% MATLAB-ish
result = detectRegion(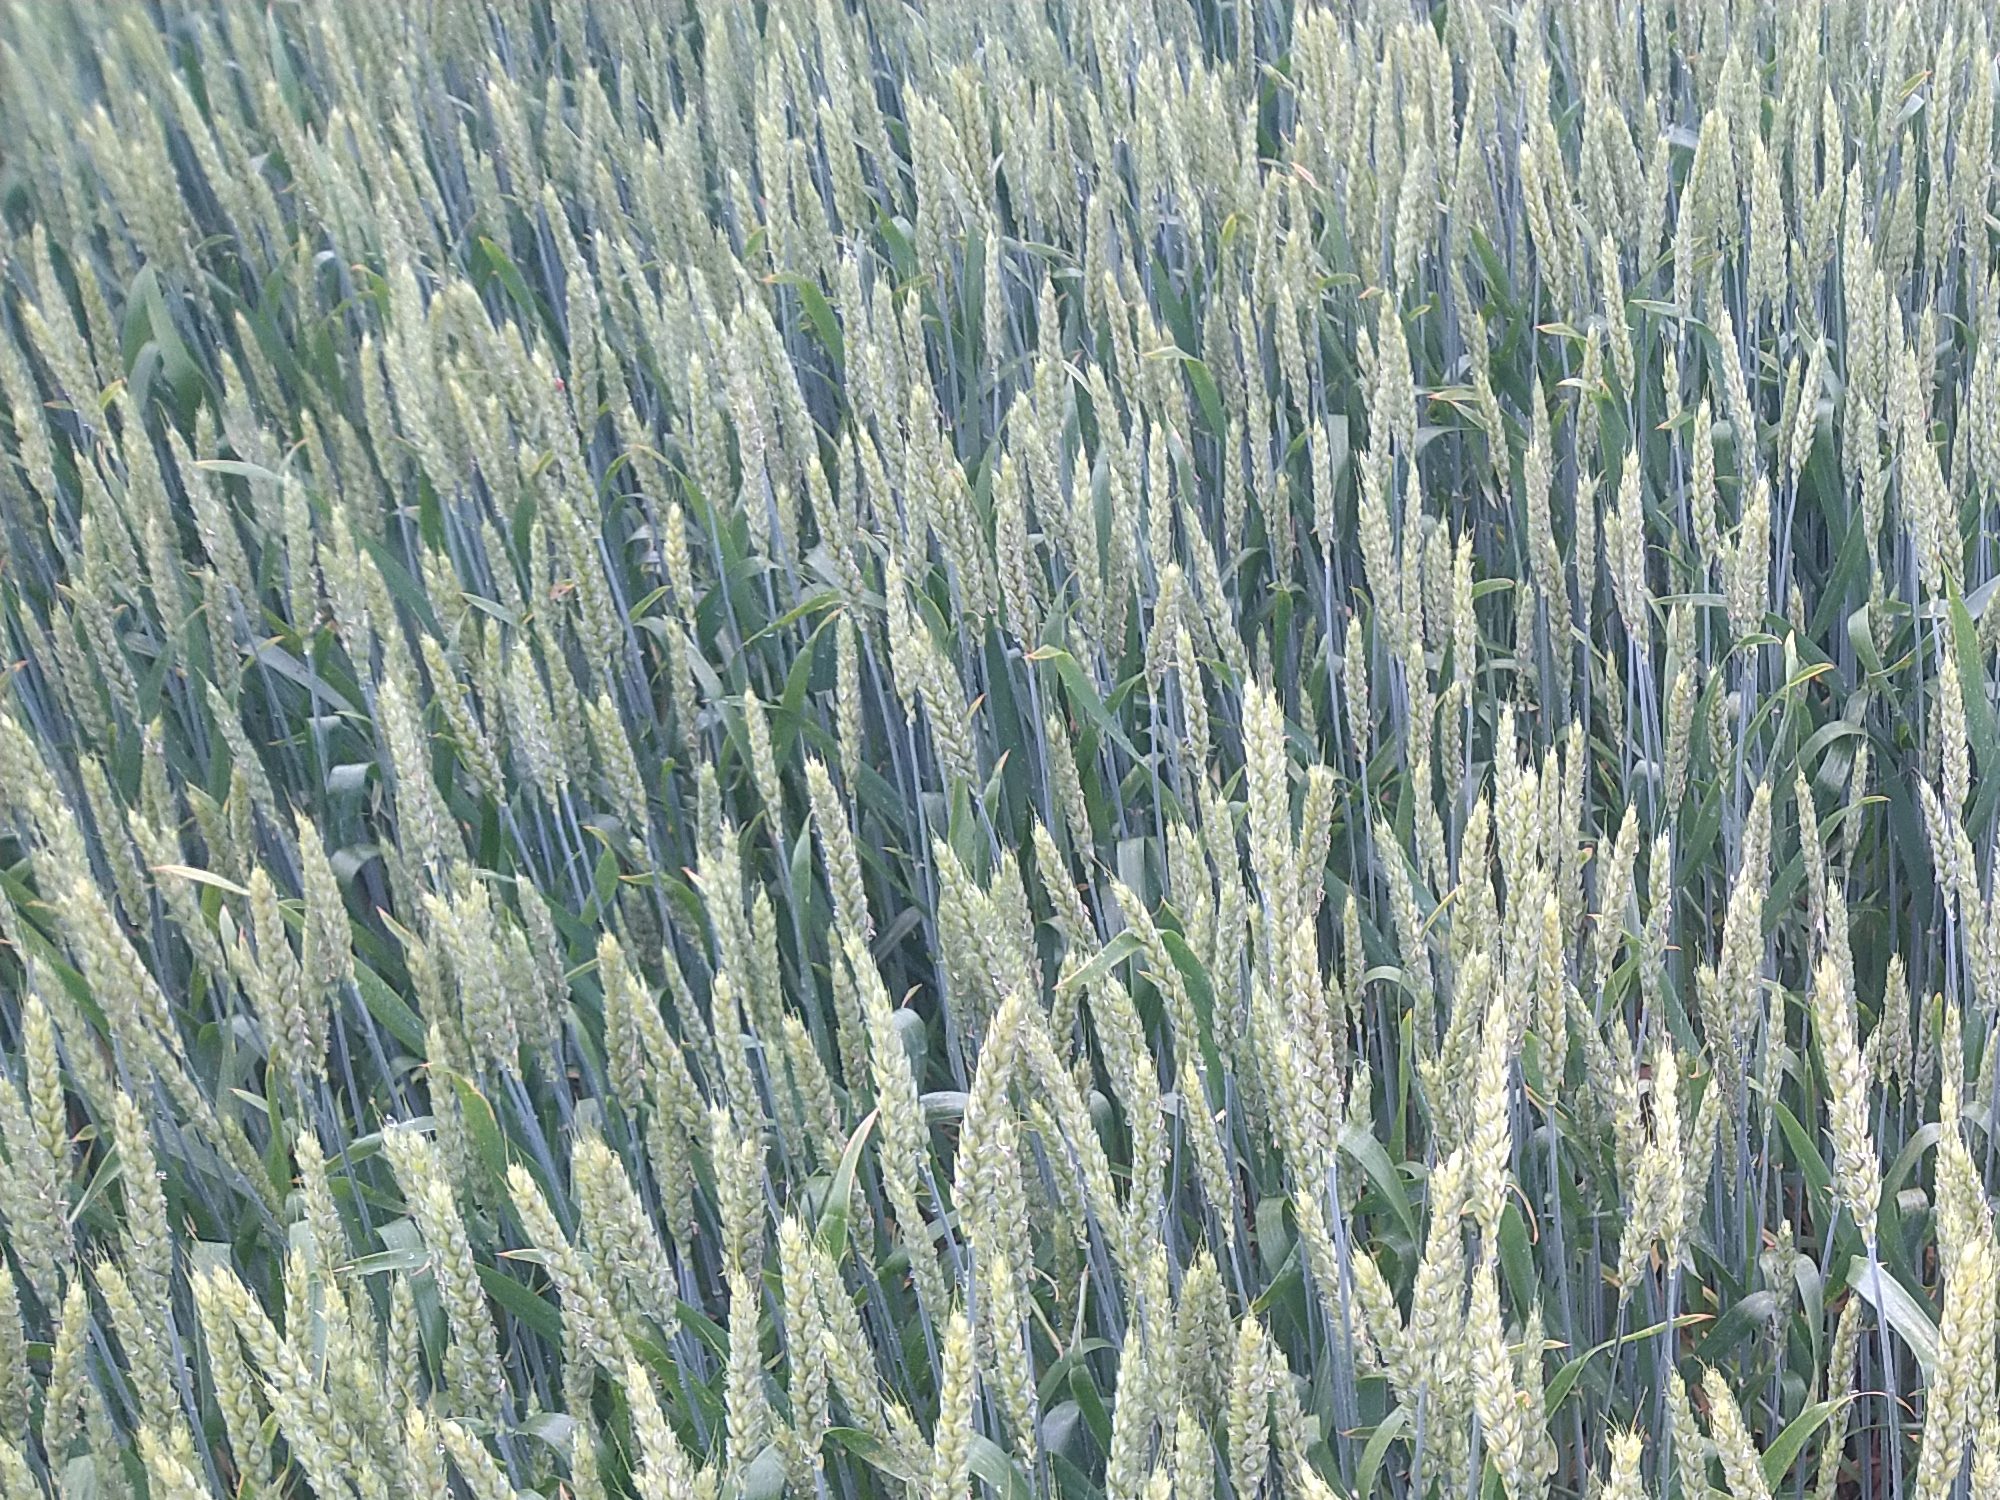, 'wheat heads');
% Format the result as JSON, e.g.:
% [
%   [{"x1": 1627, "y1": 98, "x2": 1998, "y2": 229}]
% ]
[
  {"x1": 1176, "y1": 630, "x2": 1209, "y2": 765},
  {"x1": 1018, "y1": 1134, "x2": 1052, "y2": 1227},
  {"x1": 1338, "y1": 1074, "x2": 1373, "y2": 1211},
  {"x1": 666, "y1": 505, "x2": 694, "y2": 618},
  {"x1": 1882, "y1": 954, "x2": 1909, "y2": 1023},
  {"x1": 1974, "y1": 586, "x2": 2000, "y2": 655},
  {"x1": 1368, "y1": 384, "x2": 1392, "y2": 486},
  {"x1": 20, "y1": 604, "x2": 69, "y2": 713},
  {"x1": 759, "y1": 123, "x2": 787, "y2": 268},
  {"x1": 1843, "y1": 744, "x2": 1868, "y2": 865},
  {"x1": 1606, "y1": 652, "x2": 1623, "y2": 740},
  {"x1": 461, "y1": 898, "x2": 517, "y2": 1066},
  {"x1": 1603, "y1": 514, "x2": 1626, "y2": 624},
  {"x1": 1286, "y1": 922, "x2": 1342, "y2": 1188},
  {"x1": 625, "y1": 1365, "x2": 695, "y2": 1495},
  {"x1": 1915, "y1": 993, "x2": 1934, "y2": 1115},
  {"x1": 1545, "y1": 539, "x2": 1572, "y2": 688},
  {"x1": 597, "y1": 697, "x2": 649, "y2": 826},
  {"x1": 1176, "y1": 1271, "x2": 1213, "y2": 1418},
  {"x1": 512, "y1": 652, "x2": 565, "y2": 783},
  {"x1": 952, "y1": 997, "x2": 1022, "y2": 1229},
  {"x1": 96, "y1": 155, "x2": 159, "y2": 262},
  {"x1": 597, "y1": 938, "x2": 644, "y2": 1106},
  {"x1": 779, "y1": 1221, "x2": 830, "y2": 1444},
  {"x1": 1682, "y1": 1079, "x2": 1722, "y2": 1216},
  {"x1": 23, "y1": 999, "x2": 69, "y2": 1172},
  {"x1": 1640, "y1": 834, "x2": 1672, "y2": 1004},
  {"x1": 83, "y1": 1387, "x2": 135, "y2": 1500},
  {"x1": 1145, "y1": 570, "x2": 1180, "y2": 687},
  {"x1": 1311, "y1": 422, "x2": 1333, "y2": 538},
  {"x1": 765, "y1": 1044, "x2": 803, "y2": 1160},
  {"x1": 599, "y1": 344, "x2": 637, "y2": 440},
  {"x1": 508, "y1": 932, "x2": 555, "y2": 1073},
  {"x1": 480, "y1": 155, "x2": 511, "y2": 252},
  {"x1": 1106, "y1": 1338, "x2": 1142, "y2": 1500},
  {"x1": 134, "y1": 1025, "x2": 221, "y2": 1143},
  {"x1": 337, "y1": 418, "x2": 387, "y2": 539},
  {"x1": 1293, "y1": 1196, "x2": 1367, "y2": 1364},
  {"x1": 424, "y1": 1028, "x2": 464, "y2": 1185},
  {"x1": 1212, "y1": 299, "x2": 1245, "y2": 417},
  {"x1": 780, "y1": 25, "x2": 815, "y2": 135},
  {"x1": 619, "y1": 243, "x2": 665, "y2": 356},
  {"x1": 1888, "y1": 292, "x2": 1898, "y2": 439},
  {"x1": 1143, "y1": 1255, "x2": 1170, "y2": 1367},
  {"x1": 743, "y1": 690, "x2": 783, "y2": 831},
  {"x1": 1413, "y1": 762, "x2": 1433, "y2": 876},
  {"x1": 1970, "y1": 353, "x2": 1988, "y2": 492},
  {"x1": 1, "y1": 1168, "x2": 64, "y2": 1319},
  {"x1": 1287, "y1": 178, "x2": 1315, "y2": 280},
  {"x1": 1771, "y1": 1222, "x2": 1797, "y2": 1353},
  {"x1": 1111, "y1": 887, "x2": 1205, "y2": 1065},
  {"x1": 804, "y1": 761, "x2": 872, "y2": 944},
  {"x1": 1233, "y1": 1041, "x2": 1267, "y2": 1155},
  {"x1": 874, "y1": 283, "x2": 908, "y2": 410},
  {"x1": 575, "y1": 1149, "x2": 680, "y2": 1331},
  {"x1": 1943, "y1": 1006, "x2": 1964, "y2": 1101},
  {"x1": 1807, "y1": 1302, "x2": 1858, "y2": 1500},
  {"x1": 1346, "y1": 619, "x2": 1370, "y2": 749},
  {"x1": 191, "y1": 1278, "x2": 271, "y2": 1486},
  {"x1": 1716, "y1": 114, "x2": 1739, "y2": 242},
  {"x1": 903, "y1": 294, "x2": 931, "y2": 388},
  {"x1": 1429, "y1": 808, "x2": 1449, "y2": 897},
  {"x1": 1667, "y1": 1370, "x2": 1706, "y2": 1500},
  {"x1": 1883, "y1": 185, "x2": 1913, "y2": 278},
  {"x1": 571, "y1": 1432, "x2": 612, "y2": 1500},
  {"x1": 1515, "y1": 584, "x2": 1536, "y2": 694},
  {"x1": 755, "y1": 306, "x2": 816, "y2": 448},
  {"x1": 1085, "y1": 93, "x2": 1121, "y2": 208},
  {"x1": 419, "y1": 638, "x2": 505, "y2": 797},
  {"x1": 1472, "y1": 1001, "x2": 1511, "y2": 1225},
  {"x1": 71, "y1": 588, "x2": 143, "y2": 723},
  {"x1": 1467, "y1": 1268, "x2": 1520, "y2": 1476},
  {"x1": 379, "y1": 687, "x2": 436, "y2": 860},
  {"x1": 708, "y1": 408, "x2": 734, "y2": 513},
  {"x1": 1186, "y1": 894, "x2": 1212, "y2": 967},
  {"x1": 1920, "y1": 309, "x2": 1936, "y2": 411},
  {"x1": 774, "y1": 1432, "x2": 831, "y2": 1500},
  {"x1": 1403, "y1": 549, "x2": 1421, "y2": 643},
  {"x1": 644, "y1": 154, "x2": 679, "y2": 260},
  {"x1": 910, "y1": 627, "x2": 979, "y2": 789},
  {"x1": 1344, "y1": 897, "x2": 1364, "y2": 1009},
  {"x1": 360, "y1": 336, "x2": 405, "y2": 500},
  {"x1": 1264, "y1": 877, "x2": 1294, "y2": 1002},
  {"x1": 449, "y1": 383, "x2": 507, "y2": 510},
  {"x1": 994, "y1": 1126, "x2": 1032, "y2": 1292},
  {"x1": 1778, "y1": 356, "x2": 1802, "y2": 475},
  {"x1": 1955, "y1": 1147, "x2": 1995, "y2": 1244},
  {"x1": 1053, "y1": 1215, "x2": 1078, "y2": 1340},
  {"x1": 937, "y1": 119, "x2": 988, "y2": 227},
  {"x1": 1744, "y1": 783, "x2": 1773, "y2": 891},
  {"x1": 698, "y1": 857, "x2": 751, "y2": 1014},
  {"x1": 857, "y1": 429, "x2": 900, "y2": 551},
  {"x1": 119, "y1": 1235, "x2": 174, "y2": 1358},
  {"x1": 1392, "y1": 319, "x2": 1417, "y2": 453},
  {"x1": 1841, "y1": 366, "x2": 1861, "y2": 483},
  {"x1": 210, "y1": 1277, "x2": 361, "y2": 1470},
  {"x1": 43, "y1": 1287, "x2": 89, "y2": 1472},
  {"x1": 1453, "y1": 535, "x2": 1476, "y2": 679},
  {"x1": 1238, "y1": 298, "x2": 1269, "y2": 423},
  {"x1": 1619, "y1": 1150, "x2": 1657, "y2": 1283},
  {"x1": 31, "y1": 960, "x2": 113, "y2": 1113},
  {"x1": 1148, "y1": 424, "x2": 1171, "y2": 567},
  {"x1": 1507, "y1": 770, "x2": 1539, "y2": 942},
  {"x1": 1977, "y1": 1027, "x2": 2000, "y2": 1105},
  {"x1": 390, "y1": 153, "x2": 442, "y2": 263},
  {"x1": 0, "y1": 1443, "x2": 65, "y2": 1500},
  {"x1": 1575, "y1": 329, "x2": 1600, "y2": 465},
  {"x1": 1823, "y1": 88, "x2": 1843, "y2": 230},
  {"x1": 1174, "y1": 1413, "x2": 1214, "y2": 1500},
  {"x1": 0, "y1": 1084, "x2": 71, "y2": 1243},
  {"x1": 360, "y1": 553, "x2": 399, "y2": 640},
  {"x1": 662, "y1": 1126, "x2": 697, "y2": 1254},
  {"x1": 1493, "y1": 707, "x2": 1517, "y2": 862},
  {"x1": 1272, "y1": 1354, "x2": 1306, "y2": 1500},
  {"x1": 1934, "y1": 1083, "x2": 1961, "y2": 1270},
  {"x1": 1918, "y1": 781, "x2": 1956, "y2": 909},
  {"x1": 440, "y1": 1428, "x2": 576, "y2": 1500},
  {"x1": 1265, "y1": 695, "x2": 1289, "y2": 852},
  {"x1": 1442, "y1": 684, "x2": 1464, "y2": 800},
  {"x1": 542, "y1": 185, "x2": 582, "y2": 272},
  {"x1": 1128, "y1": 1061, "x2": 1163, "y2": 1248},
  {"x1": 952, "y1": 497, "x2": 986, "y2": 619},
  {"x1": 422, "y1": 896, "x2": 470, "y2": 972},
  {"x1": 1721, "y1": 1108, "x2": 1738, "y2": 1191},
  {"x1": 589, "y1": 544, "x2": 627, "y2": 662},
  {"x1": 1182, "y1": 1067, "x2": 1235, "y2": 1234},
  {"x1": 81, "y1": 516, "x2": 110, "y2": 604},
  {"x1": 1477, "y1": 375, "x2": 1511, "y2": 492},
  {"x1": 971, "y1": 86, "x2": 994, "y2": 198},
  {"x1": 1608, "y1": 1438, "x2": 1661, "y2": 1500},
  {"x1": 1440, "y1": 957, "x2": 1490, "y2": 1069},
  {"x1": 783, "y1": 1019, "x2": 842, "y2": 1164},
  {"x1": 224, "y1": 1117, "x2": 283, "y2": 1218},
  {"x1": 1450, "y1": 264, "x2": 1476, "y2": 353},
  {"x1": 51, "y1": 609, "x2": 112, "y2": 749},
  {"x1": 667, "y1": 623, "x2": 700, "y2": 765},
  {"x1": 1951, "y1": 409, "x2": 1968, "y2": 503},
  {"x1": 1068, "y1": 622, "x2": 1098, "y2": 691},
  {"x1": 621, "y1": 883, "x2": 664, "y2": 972},
  {"x1": 1765, "y1": 986, "x2": 1787, "y2": 1099},
  {"x1": 1924, "y1": 448, "x2": 1964, "y2": 590},
  {"x1": 828, "y1": 929, "x2": 863, "y2": 1024},
  {"x1": 1404, "y1": 461, "x2": 1423, "y2": 557},
  {"x1": 1358, "y1": 503, "x2": 1398, "y2": 639},
  {"x1": 248, "y1": 875, "x2": 307, "y2": 1059},
  {"x1": 1706, "y1": 1375, "x2": 1797, "y2": 1500},
  {"x1": 1252, "y1": 993, "x2": 1286, "y2": 1147},
  {"x1": 1595, "y1": 803, "x2": 1640, "y2": 968},
  {"x1": 1859, "y1": 404, "x2": 1881, "y2": 542},
  {"x1": 354, "y1": 1365, "x2": 413, "y2": 1495},
  {"x1": 300, "y1": 410, "x2": 338, "y2": 502},
  {"x1": 218, "y1": 506, "x2": 260, "y2": 615},
  {"x1": 1212, "y1": 799, "x2": 1240, "y2": 895},
  {"x1": 387, "y1": 1275, "x2": 422, "y2": 1417},
  {"x1": 989, "y1": 1258, "x2": 1037, "y2": 1454},
  {"x1": 736, "y1": 398, "x2": 771, "y2": 558},
  {"x1": 423, "y1": 774, "x2": 471, "y2": 877},
  {"x1": 1717, "y1": 901, "x2": 1741, "y2": 1022},
  {"x1": 264, "y1": 87, "x2": 324, "y2": 214},
  {"x1": 1609, "y1": 110, "x2": 1646, "y2": 211},
  {"x1": 710, "y1": 978, "x2": 765, "y2": 1140},
  {"x1": 844, "y1": 942, "x2": 929, "y2": 1178},
  {"x1": 1518, "y1": 1355, "x2": 1547, "y2": 1500},
  {"x1": 1695, "y1": 968, "x2": 1722, "y2": 1055},
  {"x1": 1796, "y1": 774, "x2": 1825, "y2": 933},
  {"x1": 1430, "y1": 528, "x2": 1452, "y2": 647},
  {"x1": 1792, "y1": 350, "x2": 1824, "y2": 471},
  {"x1": 727, "y1": 171, "x2": 762, "y2": 249},
  {"x1": 938, "y1": 889, "x2": 984, "y2": 1027},
  {"x1": 349, "y1": 1278, "x2": 378, "y2": 1365},
  {"x1": 20, "y1": 305, "x2": 110, "y2": 439},
  {"x1": 127, "y1": 817, "x2": 226, "y2": 971},
  {"x1": 561, "y1": 1310, "x2": 594, "y2": 1428},
  {"x1": 406, "y1": 1417, "x2": 471, "y2": 1500},
  {"x1": 1243, "y1": 680, "x2": 1270, "y2": 870},
  {"x1": 806, "y1": 460, "x2": 867, "y2": 610},
  {"x1": 379, "y1": 839, "x2": 418, "y2": 930},
  {"x1": 662, "y1": 949, "x2": 723, "y2": 1093},
  {"x1": 1277, "y1": 285, "x2": 1309, "y2": 410},
  {"x1": 1350, "y1": 1252, "x2": 1413, "y2": 1400},
  {"x1": 1182, "y1": 508, "x2": 1249, "y2": 676},
  {"x1": 839, "y1": 261, "x2": 870, "y2": 418},
  {"x1": 1453, "y1": 799, "x2": 1490, "y2": 964},
  {"x1": 1693, "y1": 400, "x2": 1717, "y2": 555},
  {"x1": 905, "y1": 94, "x2": 937, "y2": 278},
  {"x1": 1567, "y1": 983, "x2": 1617, "y2": 1107},
  {"x1": 1965, "y1": 1251, "x2": 1998, "y2": 1447},
  {"x1": 0, "y1": 878, "x2": 24, "y2": 955},
  {"x1": 1736, "y1": 890, "x2": 1764, "y2": 1032},
  {"x1": 1653, "y1": 1050, "x2": 1680, "y2": 1161},
  {"x1": 1411, "y1": 1157, "x2": 1467, "y2": 1340},
  {"x1": 1407, "y1": 645, "x2": 1428, "y2": 763},
  {"x1": 383, "y1": 343, "x2": 455, "y2": 492},
  {"x1": 395, "y1": 121, "x2": 451, "y2": 233},
  {"x1": 1025, "y1": 1032, "x2": 1118, "y2": 1208},
  {"x1": 0, "y1": 717, "x2": 69, "y2": 827},
  {"x1": 1225, "y1": 420, "x2": 1245, "y2": 549},
  {"x1": 886, "y1": 1407, "x2": 934, "y2": 1480},
  {"x1": 1047, "y1": 717, "x2": 1095, "y2": 865},
  {"x1": 426, "y1": 1189, "x2": 507, "y2": 1424},
  {"x1": 1708, "y1": 672, "x2": 1731, "y2": 785},
  {"x1": 806, "y1": 185, "x2": 841, "y2": 290},
  {"x1": 1248, "y1": 904, "x2": 1267, "y2": 982},
  {"x1": 1327, "y1": 977, "x2": 1349, "y2": 1072},
  {"x1": 985, "y1": 235, "x2": 1003, "y2": 365},
  {"x1": 253, "y1": 174, "x2": 291, "y2": 257},
  {"x1": 557, "y1": 504, "x2": 605, "y2": 647},
  {"x1": 1294, "y1": 1195, "x2": 1343, "y2": 1314},
  {"x1": 621, "y1": 66, "x2": 639, "y2": 147},
  {"x1": 186, "y1": 789, "x2": 247, "y2": 921},
  {"x1": 1731, "y1": 482, "x2": 1769, "y2": 636},
  {"x1": 835, "y1": 615, "x2": 862, "y2": 786},
  {"x1": 324, "y1": 1288, "x2": 355, "y2": 1414},
  {"x1": 1665, "y1": 673, "x2": 1694, "y2": 805},
  {"x1": 814, "y1": 1255, "x2": 886, "y2": 1440},
  {"x1": 587, "y1": 75, "x2": 628, "y2": 163},
  {"x1": 74, "y1": 453, "x2": 142, "y2": 597},
  {"x1": 1001, "y1": 119, "x2": 1026, "y2": 221},
  {"x1": 1418, "y1": 1065, "x2": 1463, "y2": 1157},
  {"x1": 295, "y1": 1134, "x2": 350, "y2": 1276},
  {"x1": 296, "y1": 815, "x2": 355, "y2": 979},
  {"x1": 1039, "y1": 278, "x2": 1065, "y2": 414},
  {"x1": 1050, "y1": 955, "x2": 1080, "y2": 1065},
  {"x1": 566, "y1": 275, "x2": 597, "y2": 436},
  {"x1": 506, "y1": 1174, "x2": 630, "y2": 1372},
  {"x1": 839, "y1": 436, "x2": 856, "y2": 539},
  {"x1": 726, "y1": 1274, "x2": 763, "y2": 1465},
  {"x1": 866, "y1": 348, "x2": 904, "y2": 485},
  {"x1": 688, "y1": 357, "x2": 713, "y2": 495},
  {"x1": 112, "y1": 1094, "x2": 173, "y2": 1283},
  {"x1": 1827, "y1": 883, "x2": 1857, "y2": 1022},
  {"x1": 595, "y1": 163, "x2": 627, "y2": 240},
  {"x1": 1227, "y1": 1322, "x2": 1270, "y2": 1499},
  {"x1": 205, "y1": 684, "x2": 278, "y2": 824},
  {"x1": 596, "y1": 233, "x2": 637, "y2": 349},
  {"x1": 1024, "y1": 434, "x2": 1073, "y2": 558},
  {"x1": 146, "y1": 523, "x2": 189, "y2": 663},
  {"x1": 1071, "y1": 450, "x2": 1100, "y2": 627},
  {"x1": 1601, "y1": 236, "x2": 1635, "y2": 386},
  {"x1": 285, "y1": 1250, "x2": 312, "y2": 1356},
  {"x1": 95, "y1": 1268, "x2": 190, "y2": 1448},
  {"x1": 864, "y1": 83, "x2": 903, "y2": 208},
  {"x1": 1621, "y1": 456, "x2": 1646, "y2": 642},
  {"x1": 711, "y1": 1110, "x2": 739, "y2": 1262},
  {"x1": 1519, "y1": 147, "x2": 1557, "y2": 287},
  {"x1": 832, "y1": 961, "x2": 869, "y2": 1112},
  {"x1": 300, "y1": 899, "x2": 329, "y2": 1066},
  {"x1": 1239, "y1": 0, "x2": 1254, "y2": 92},
  {"x1": 1592, "y1": 128, "x2": 1623, "y2": 236},
  {"x1": 1103, "y1": 272, "x2": 1137, "y2": 403},
  {"x1": 819, "y1": 101, "x2": 854, "y2": 232},
  {"x1": 229, "y1": 767, "x2": 257, "y2": 877},
  {"x1": 1088, "y1": 984, "x2": 1134, "y2": 1110},
  {"x1": 1532, "y1": 378, "x2": 1553, "y2": 469},
  {"x1": 626, "y1": 985, "x2": 713, "y2": 1144},
  {"x1": 1538, "y1": 904, "x2": 1567, "y2": 1095},
  {"x1": 78, "y1": 757, "x2": 153, "y2": 930},
  {"x1": 698, "y1": 763, "x2": 722, "y2": 865},
  {"x1": 490, "y1": 89, "x2": 537, "y2": 210},
  {"x1": 1690, "y1": 112, "x2": 1715, "y2": 203},
  {"x1": 481, "y1": 521, "x2": 526, "y2": 619},
  {"x1": 1448, "y1": 1426, "x2": 1472, "y2": 1500},
  {"x1": 963, "y1": 887, "x2": 1038, "y2": 1009},
  {"x1": 409, "y1": 951, "x2": 473, "y2": 1078},
  {"x1": 381, "y1": 1131, "x2": 435, "y2": 1241},
  {"x1": 829, "y1": 1141, "x2": 877, "y2": 1267},
  {"x1": 351, "y1": 116, "x2": 393, "y2": 202},
  {"x1": 691, "y1": 270, "x2": 731, "y2": 374},
  {"x1": 284, "y1": 477, "x2": 318, "y2": 638},
  {"x1": 1958, "y1": 877, "x2": 1993, "y2": 1004},
  {"x1": 1031, "y1": 824, "x2": 1101, "y2": 952},
  {"x1": 904, "y1": 451, "x2": 928, "y2": 582},
  {"x1": 1524, "y1": 450, "x2": 1550, "y2": 585},
  {"x1": 1213, "y1": 884, "x2": 1243, "y2": 1058},
  {"x1": 886, "y1": 559, "x2": 915, "y2": 706},
  {"x1": 74, "y1": 891, "x2": 186, "y2": 1050},
  {"x1": 884, "y1": 1172, "x2": 950, "y2": 1330},
  {"x1": 1563, "y1": 718, "x2": 1586, "y2": 830},
  {"x1": 75, "y1": 258, "x2": 125, "y2": 387},
  {"x1": 530, "y1": 521, "x2": 553, "y2": 633},
  {"x1": 1002, "y1": 852, "x2": 1037, "y2": 957},
  {"x1": 1395, "y1": 152, "x2": 1421, "y2": 286},
  {"x1": 542, "y1": 637, "x2": 591, "y2": 791},
  {"x1": 1791, "y1": 241, "x2": 1817, "y2": 327},
  {"x1": 1166, "y1": 822, "x2": 1184, "y2": 913},
  {"x1": 14, "y1": 409, "x2": 57, "y2": 505},
  {"x1": 1767, "y1": 180, "x2": 1786, "y2": 298},
  {"x1": 1201, "y1": 1256, "x2": 1235, "y2": 1377},
  {"x1": 170, "y1": 77, "x2": 229, "y2": 205},
  {"x1": 1941, "y1": 658, "x2": 1970, "y2": 812},
  {"x1": 488, "y1": 399, "x2": 520, "y2": 499},
  {"x1": 1813, "y1": 967, "x2": 1881, "y2": 1226},
  {"x1": 660, "y1": 881, "x2": 706, "y2": 958},
  {"x1": 233, "y1": 311, "x2": 293, "y2": 434},
  {"x1": 517, "y1": 879, "x2": 584, "y2": 1021},
  {"x1": 624, "y1": 414, "x2": 671, "y2": 521},
  {"x1": 1866, "y1": 272, "x2": 1887, "y2": 407},
  {"x1": 738, "y1": 1139, "x2": 767, "y2": 1278},
  {"x1": 1881, "y1": 955, "x2": 1904, "y2": 1077},
  {"x1": 1301, "y1": 770, "x2": 1334, "y2": 915},
  {"x1": 929, "y1": 1321, "x2": 976, "y2": 1500},
  {"x1": 751, "y1": 885, "x2": 782, "y2": 1024},
  {"x1": 196, "y1": 409, "x2": 224, "y2": 499},
  {"x1": 202, "y1": 573, "x2": 240, "y2": 693},
  {"x1": 996, "y1": 515, "x2": 1033, "y2": 647},
  {"x1": 1407, "y1": 912, "x2": 1436, "y2": 1058},
  {"x1": 1576, "y1": 475, "x2": 1597, "y2": 609},
  {"x1": 1084, "y1": 199, "x2": 1102, "y2": 326},
  {"x1": 1088, "y1": 365, "x2": 1133, "y2": 488},
  {"x1": 1, "y1": 1261, "x2": 31, "y2": 1443}
]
